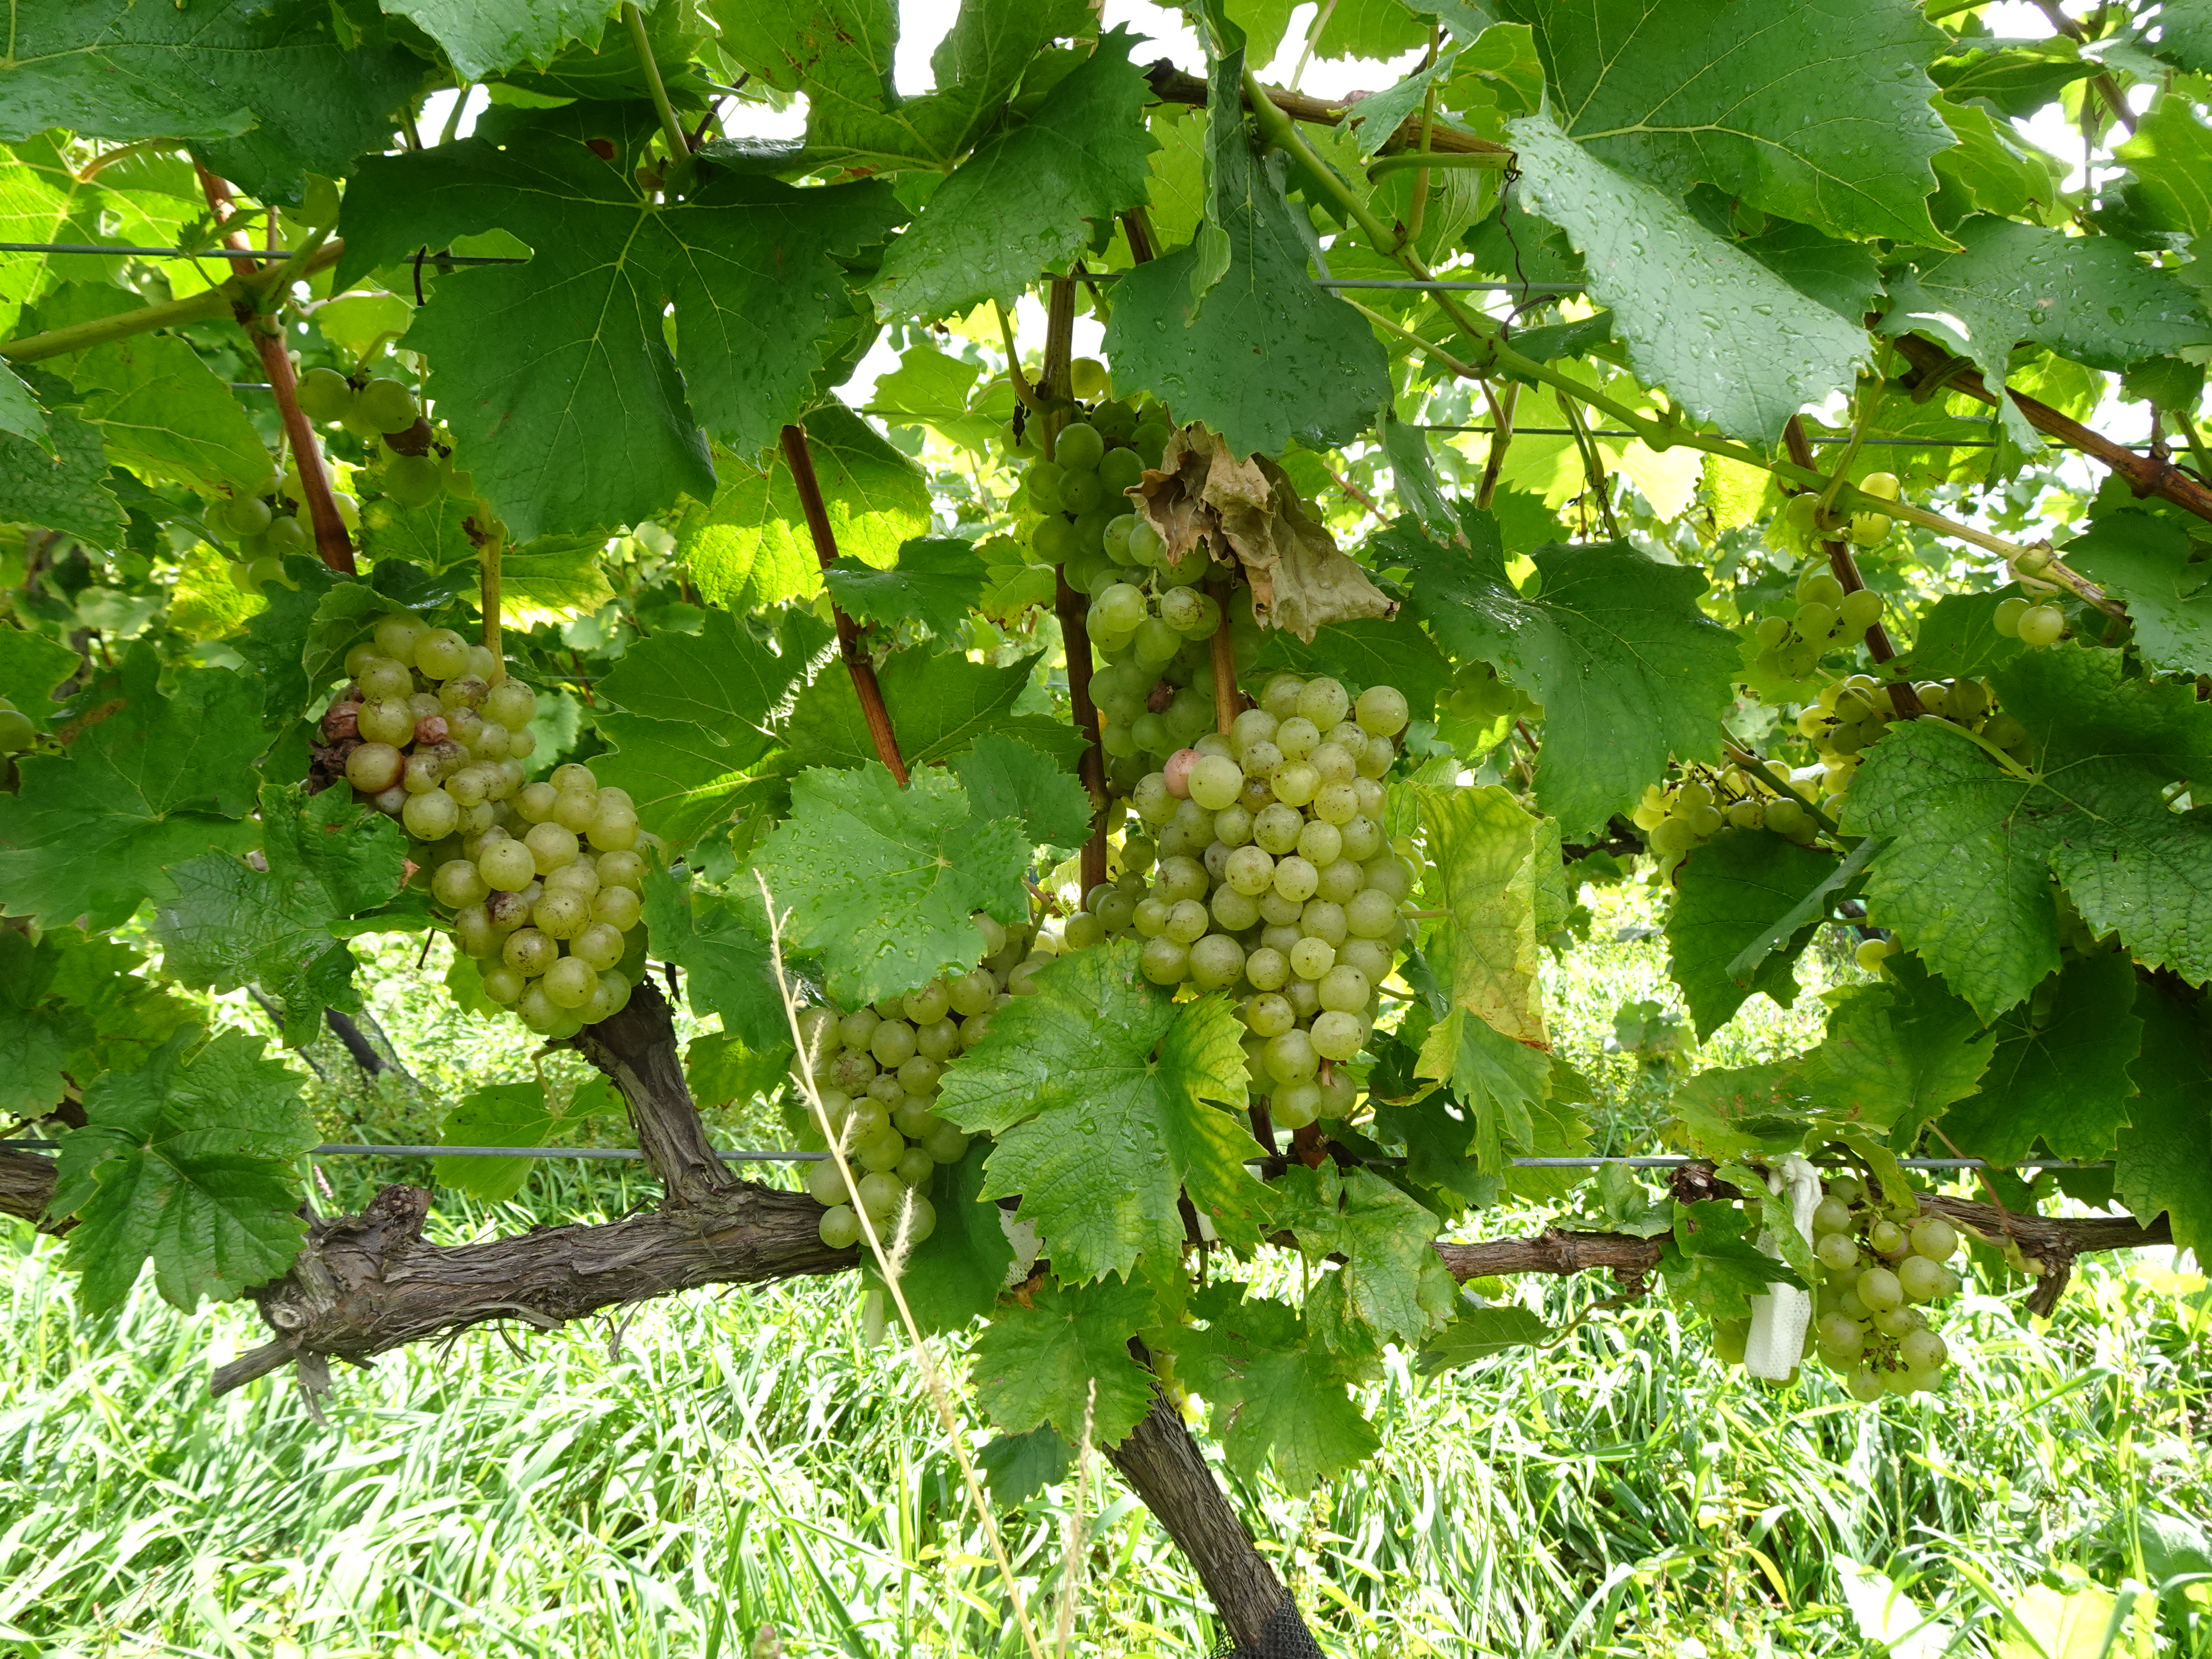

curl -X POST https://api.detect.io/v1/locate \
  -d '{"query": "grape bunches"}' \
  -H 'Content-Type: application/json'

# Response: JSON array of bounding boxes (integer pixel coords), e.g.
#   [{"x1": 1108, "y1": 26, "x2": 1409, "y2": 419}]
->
[
  {"x1": 1003, "y1": 358, "x2": 1178, "y2": 595},
  {"x1": 1133, "y1": 674, "x2": 1412, "y2": 1128},
  {"x1": 1632, "y1": 751, "x2": 1750, "y2": 882},
  {"x1": 1994, "y1": 597, "x2": 2064, "y2": 647},
  {"x1": 204, "y1": 457, "x2": 359, "y2": 596},
  {"x1": 1435, "y1": 659, "x2": 1544, "y2": 721},
  {"x1": 1064, "y1": 837, "x2": 1164, "y2": 949},
  {"x1": 1755, "y1": 576, "x2": 1882, "y2": 681},
  {"x1": 324, "y1": 607, "x2": 535, "y2": 842},
  {"x1": 790, "y1": 911, "x2": 1070, "y2": 1248},
  {"x1": 1854, "y1": 931, "x2": 1904, "y2": 982},
  {"x1": 1086, "y1": 515, "x2": 1275, "y2": 834},
  {"x1": 294, "y1": 368, "x2": 474, "y2": 510},
  {"x1": 1816, "y1": 1175, "x2": 1960, "y2": 1403},
  {"x1": 1784, "y1": 472, "x2": 1903, "y2": 546},
  {"x1": 1796, "y1": 674, "x2": 2034, "y2": 828},
  {"x1": 1710, "y1": 1314, "x2": 1816, "y2": 1388},
  {"x1": 1728, "y1": 759, "x2": 1817, "y2": 844},
  {"x1": 405, "y1": 763, "x2": 649, "y2": 1039}
]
